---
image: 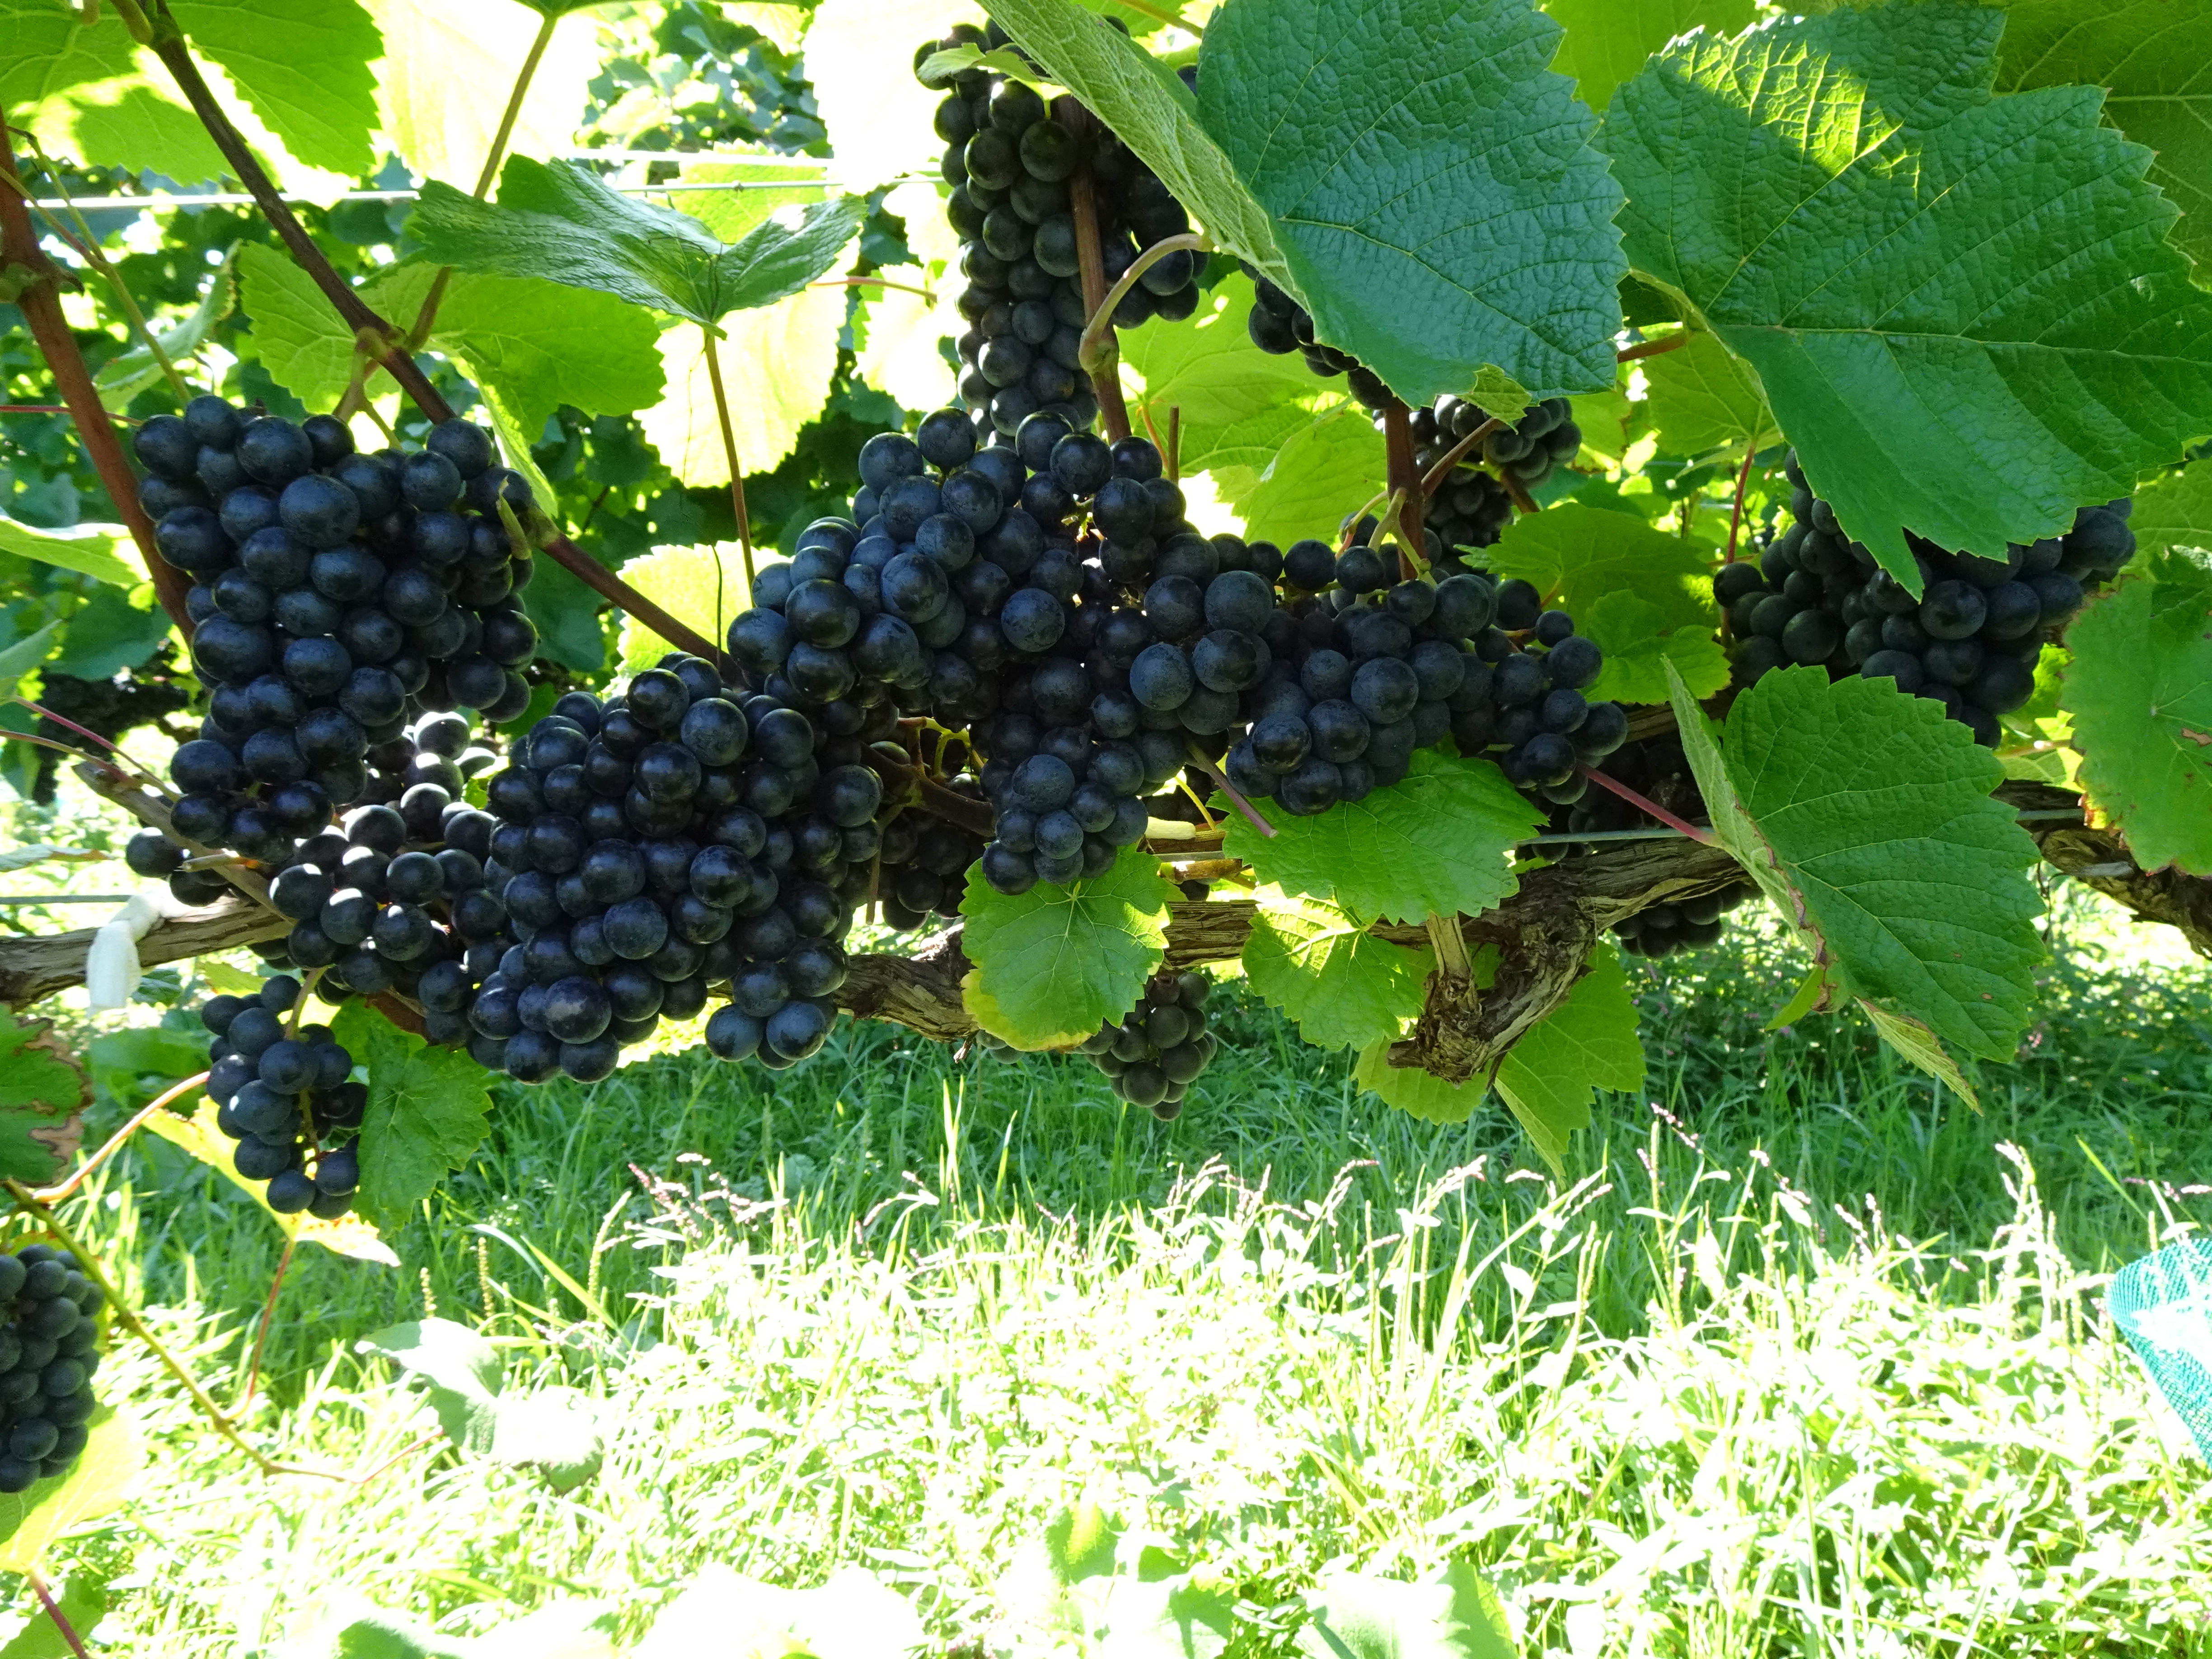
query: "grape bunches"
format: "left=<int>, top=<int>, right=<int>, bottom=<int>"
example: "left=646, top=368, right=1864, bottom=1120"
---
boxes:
left=975, top=1029, right=1025, bottom=1065
left=1610, top=878, right=1765, bottom=961
left=202, top=974, right=369, bottom=1220
left=1235, top=255, right=1403, bottom=409
left=1445, top=578, right=1628, bottom=804
left=969, top=601, right=1230, bottom=895
left=125, top=396, right=539, bottom=905
left=913, top=16, right=1208, bottom=436
left=1408, top=407, right=1517, bottom=588
left=1713, top=523, right=1867, bottom=697
left=1079, top=972, right=1218, bottom=1121
left=1016, top=411, right=1199, bottom=584
left=349, top=712, right=498, bottom=810
left=727, top=408, right=1079, bottom=741
left=869, top=727, right=997, bottom=933
left=523, top=658, right=589, bottom=696
left=705, top=741, right=884, bottom=1069
left=1434, top=393, right=1582, bottom=490
left=420, top=653, right=814, bottom=1081
left=1784, top=447, right=2137, bottom=750
left=1213, top=511, right=1380, bottom=655
left=1515, top=730, right=1694, bottom=861
left=1098, top=533, right=1278, bottom=736
left=1225, top=528, right=1498, bottom=816
left=0, top=1244, right=105, bottom=1492
left=270, top=783, right=497, bottom=1004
